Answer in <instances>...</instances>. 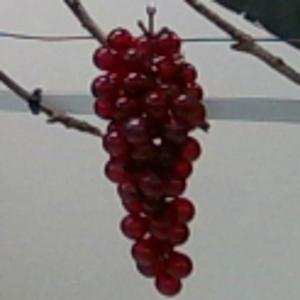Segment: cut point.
<instances>
[{
    "label": "cut point",
    "instance_id": "1",
    "mask_svg": "<svg viewBox=\"0 0 300 300\" xmlns=\"http://www.w3.org/2000/svg\"><path fill=\"white\" fill-rule=\"evenodd\" d=\"M145 14L148 16V31L155 35V17L158 15L156 0H147L144 5Z\"/></svg>",
    "mask_w": 300,
    "mask_h": 300
}]
</instances>
